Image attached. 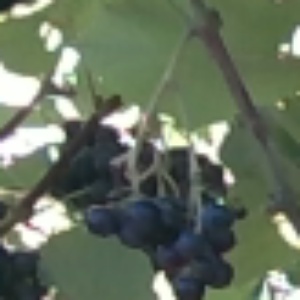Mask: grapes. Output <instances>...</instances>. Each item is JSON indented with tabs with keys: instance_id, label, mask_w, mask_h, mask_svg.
Returning a JSON list of instances; mask_svg holds the SVG:
<instances>
[{
	"instance_id": "01657485",
	"label": "grapes",
	"mask_w": 300,
	"mask_h": 300,
	"mask_svg": "<svg viewBox=\"0 0 300 300\" xmlns=\"http://www.w3.org/2000/svg\"><path fill=\"white\" fill-rule=\"evenodd\" d=\"M56 188L85 211L92 235L144 249L176 299L199 300L206 282L221 288L232 280V267L218 259L236 247L235 216L214 203L221 173L204 151L98 127L60 170Z\"/></svg>"
}]
</instances>
